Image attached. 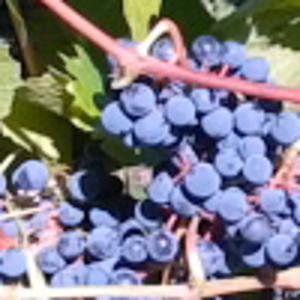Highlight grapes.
Masks as SVG:
<instances>
[{
    "label": "grapes",
    "instance_id": "1",
    "mask_svg": "<svg viewBox=\"0 0 300 300\" xmlns=\"http://www.w3.org/2000/svg\"><path fill=\"white\" fill-rule=\"evenodd\" d=\"M181 81L159 90L137 77L101 109L105 133L123 149H173L191 168L182 180L166 171L146 184L134 217L91 205L100 176L81 169L69 181L72 201L52 212L65 232L36 252V264L51 288L142 285L137 267L173 263L179 251H195L209 278L267 263L290 269L300 260V193L264 188L249 202L245 178L255 186L276 175L277 147L300 142V111L277 99H257L236 89L191 88Z\"/></svg>",
    "mask_w": 300,
    "mask_h": 300
},
{
    "label": "grapes",
    "instance_id": "2",
    "mask_svg": "<svg viewBox=\"0 0 300 300\" xmlns=\"http://www.w3.org/2000/svg\"><path fill=\"white\" fill-rule=\"evenodd\" d=\"M193 68L210 69L217 74H231L234 77L257 84L270 83V63L265 56L248 60V50L231 38L221 39L214 34H197L189 43Z\"/></svg>",
    "mask_w": 300,
    "mask_h": 300
},
{
    "label": "grapes",
    "instance_id": "3",
    "mask_svg": "<svg viewBox=\"0 0 300 300\" xmlns=\"http://www.w3.org/2000/svg\"><path fill=\"white\" fill-rule=\"evenodd\" d=\"M47 165L36 159H26L16 165L9 177V185L16 193H37L47 188Z\"/></svg>",
    "mask_w": 300,
    "mask_h": 300
},
{
    "label": "grapes",
    "instance_id": "4",
    "mask_svg": "<svg viewBox=\"0 0 300 300\" xmlns=\"http://www.w3.org/2000/svg\"><path fill=\"white\" fill-rule=\"evenodd\" d=\"M27 269V256L17 247L10 246L0 254V276L14 280L24 275Z\"/></svg>",
    "mask_w": 300,
    "mask_h": 300
},
{
    "label": "grapes",
    "instance_id": "5",
    "mask_svg": "<svg viewBox=\"0 0 300 300\" xmlns=\"http://www.w3.org/2000/svg\"><path fill=\"white\" fill-rule=\"evenodd\" d=\"M153 57L161 63L175 61V49L167 36H161L153 45Z\"/></svg>",
    "mask_w": 300,
    "mask_h": 300
}]
</instances>
